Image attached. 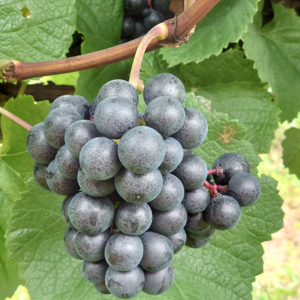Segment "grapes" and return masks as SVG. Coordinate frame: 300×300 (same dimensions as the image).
I'll use <instances>...</instances> for the list:
<instances>
[{
	"label": "grapes",
	"mask_w": 300,
	"mask_h": 300,
	"mask_svg": "<svg viewBox=\"0 0 300 300\" xmlns=\"http://www.w3.org/2000/svg\"><path fill=\"white\" fill-rule=\"evenodd\" d=\"M183 82L159 73L143 90L112 79L89 101L62 94L29 131L33 175L61 205L67 252L100 293L130 299L167 292L185 245L204 246L233 228L260 198L259 180L238 153L212 168L192 149L208 135L198 109L184 107Z\"/></svg>",
	"instance_id": "obj_1"
}]
</instances>
